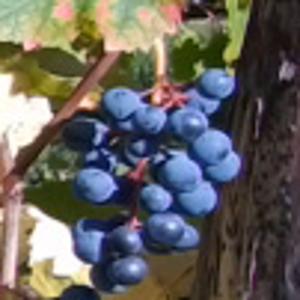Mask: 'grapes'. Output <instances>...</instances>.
I'll use <instances>...</instances> for the list:
<instances>
[{"label":"grapes","mask_w":300,"mask_h":300,"mask_svg":"<svg viewBox=\"0 0 300 300\" xmlns=\"http://www.w3.org/2000/svg\"><path fill=\"white\" fill-rule=\"evenodd\" d=\"M239 82L230 72L209 68L180 96L181 106L168 111L148 103L129 86L115 85L101 98V110L117 132L127 135L122 154L131 163L149 161L151 183L136 193L148 215L135 233L124 221L76 217L69 226L73 258L88 266L96 290L72 286L61 300H101L114 286L137 285L150 273L143 253L152 258L190 255L201 246L199 229L190 219L212 215L219 207L220 189L237 180L244 159L234 150L231 135L210 120L237 95Z\"/></svg>","instance_id":"grapes-1"},{"label":"grapes","mask_w":300,"mask_h":300,"mask_svg":"<svg viewBox=\"0 0 300 300\" xmlns=\"http://www.w3.org/2000/svg\"><path fill=\"white\" fill-rule=\"evenodd\" d=\"M111 137V126L96 116H75L62 131L65 148L72 153H84L72 191L92 206L118 205L130 193L129 182L116 174L119 157L107 143Z\"/></svg>","instance_id":"grapes-2"}]
</instances>
